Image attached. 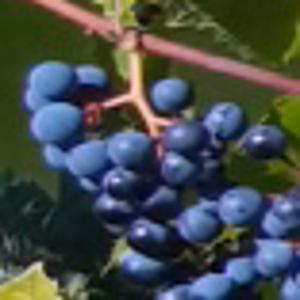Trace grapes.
Instances as JSON below:
<instances>
[{
	"label": "grapes",
	"instance_id": "grapes-1",
	"mask_svg": "<svg viewBox=\"0 0 300 300\" xmlns=\"http://www.w3.org/2000/svg\"><path fill=\"white\" fill-rule=\"evenodd\" d=\"M112 88L103 65L47 59L27 70L20 106L45 167L97 196L90 212L108 237L127 236L124 281L153 300H300V187L268 198L222 181L218 161L239 140L260 161L280 156L285 127L250 125L234 99L191 117L189 82L162 76L146 100L168 126L118 132L102 101Z\"/></svg>",
	"mask_w": 300,
	"mask_h": 300
}]
</instances>
